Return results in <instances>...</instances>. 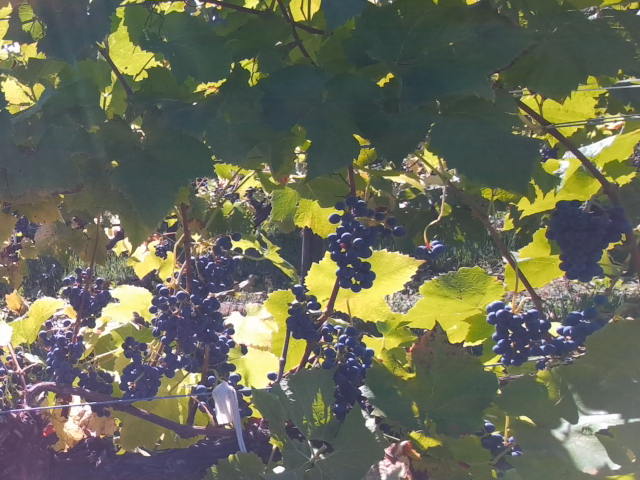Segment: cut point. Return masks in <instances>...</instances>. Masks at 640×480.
I'll use <instances>...</instances> for the list:
<instances>
[{"mask_svg":"<svg viewBox=\"0 0 640 480\" xmlns=\"http://www.w3.org/2000/svg\"><path fill=\"white\" fill-rule=\"evenodd\" d=\"M508 253H509V255H510V256H512V257L514 258V261H515V265H514V268H515V281H514V288H513V291H517V283H518V275H517V271H518L517 256H516V254H514V253H513V252H511V251H508Z\"/></svg>","mask_w":640,"mask_h":480,"instance_id":"cut-point-1","label":"cut point"},{"mask_svg":"<svg viewBox=\"0 0 640 480\" xmlns=\"http://www.w3.org/2000/svg\"><path fill=\"white\" fill-rule=\"evenodd\" d=\"M444 196H445V185L442 183V194H441V211L436 218V221H439L444 213Z\"/></svg>","mask_w":640,"mask_h":480,"instance_id":"cut-point-2","label":"cut point"},{"mask_svg":"<svg viewBox=\"0 0 640 480\" xmlns=\"http://www.w3.org/2000/svg\"><path fill=\"white\" fill-rule=\"evenodd\" d=\"M181 239H182V234H181L180 236H178V238L176 239V242H175V244H174V247H173V263H174V264H177V260H176V250H177V247H178L179 242H180V240H181Z\"/></svg>","mask_w":640,"mask_h":480,"instance_id":"cut-point-3","label":"cut point"},{"mask_svg":"<svg viewBox=\"0 0 640 480\" xmlns=\"http://www.w3.org/2000/svg\"><path fill=\"white\" fill-rule=\"evenodd\" d=\"M531 299H532V297H531V296L524 297V299H522V300L520 301V303L518 304V306H517V311H520V309H521V307L523 306V304H524L525 302H527V301L531 300Z\"/></svg>","mask_w":640,"mask_h":480,"instance_id":"cut-point-4","label":"cut point"}]
</instances>
